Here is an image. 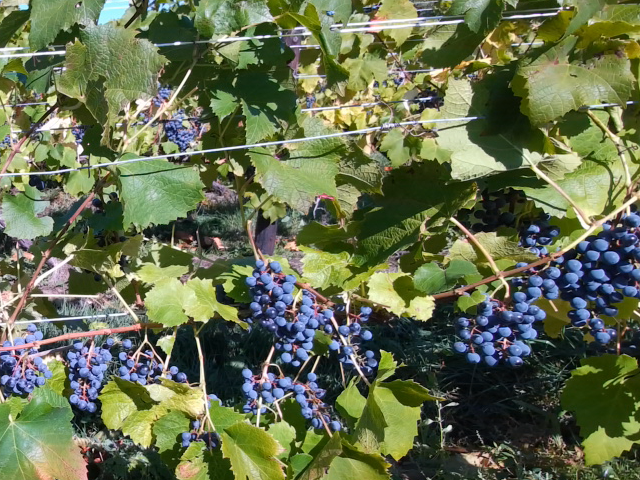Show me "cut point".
<instances>
[{"instance_id": "obj_1", "label": "cut point", "mask_w": 640, "mask_h": 480, "mask_svg": "<svg viewBox=\"0 0 640 480\" xmlns=\"http://www.w3.org/2000/svg\"><path fill=\"white\" fill-rule=\"evenodd\" d=\"M498 280L501 281V283L504 286L505 299L509 300L510 299V291H509V283H508V281L504 277L500 278Z\"/></svg>"}, {"instance_id": "obj_2", "label": "cut point", "mask_w": 640, "mask_h": 480, "mask_svg": "<svg viewBox=\"0 0 640 480\" xmlns=\"http://www.w3.org/2000/svg\"><path fill=\"white\" fill-rule=\"evenodd\" d=\"M304 292H305V290H304V289L299 288V289L296 291V293L294 294V296H293V301H294V302H297V301H298V299H299V297H300V295H301L302 293H304Z\"/></svg>"}]
</instances>
